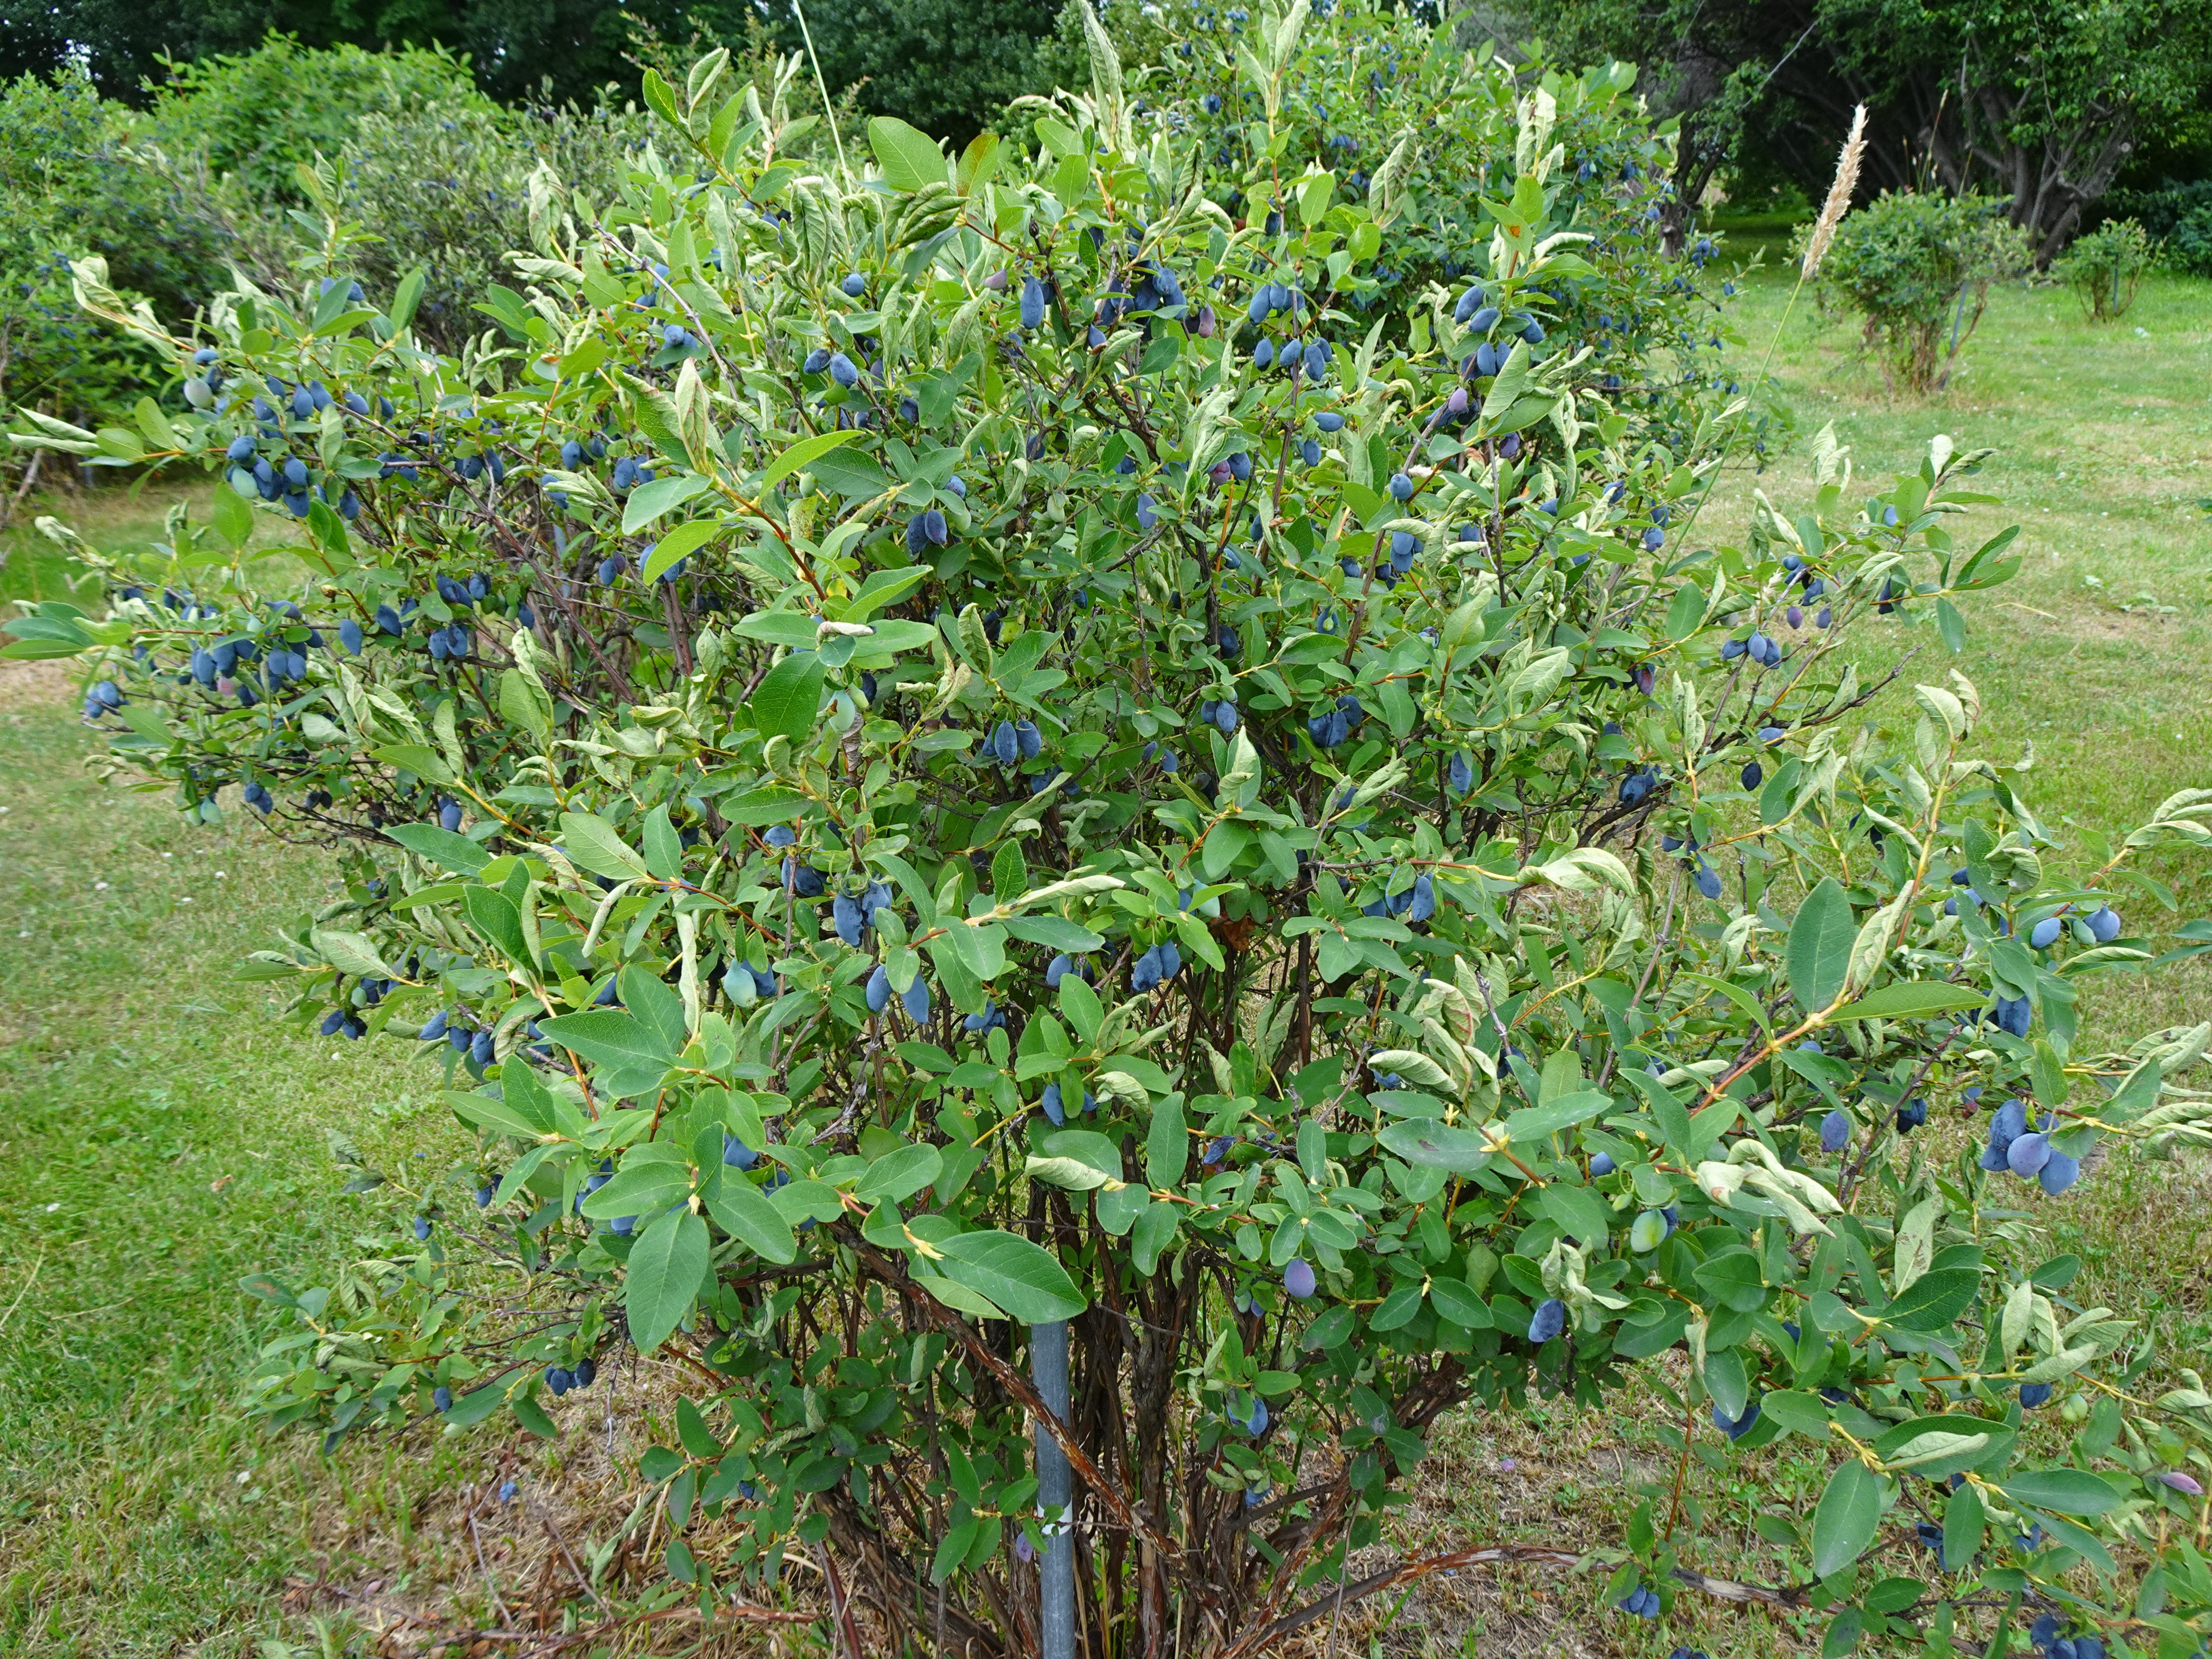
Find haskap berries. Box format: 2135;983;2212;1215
2084;906;2124;939
621;266;634;278
658;560;684;586
282;630;310;653
441;804;463;830
1150;318;1166;339
1249;1297;1265;1319
367;879;380;894
1730;1400;1761;1443
2029;1524;2043;1546
1686;842;1707;871
712;248;723;273
706;591;725;613
1603;479;1627;502
762;823;796;851
1046;496;1068;524
1738;759;1765;793
1322;616;1335;631
1471;307;1501;342
648;292;658;307
940;709;958;728
1364;894;1400;920
320;277;337;296
550;1367;570;1397
237;684;260;706
1787;605;1803;630
1622;661;1656;689
1340;559;1362;577
480;594;499;615
660;343;680;370
703;254;713;268
1376;562;1390;580
339;778;355;798
234;631;260;659
1316;610;1339;635
945;477;968;499
585;433;610;462
1312;336;1336;363
377;395;395;417
863;881;893;920
446;625;471;657
1997;914;2018;942
578;446;596;467
793;615;825;654
904;509;927;556
1472;342;1500;378
319;1007;342;1038
342;1019;359;1044
1226;1405;1242;1422
475;1182;494;1210
682;795;707;827
1390;472;1414;504
418;1009;453;1041
211;640;239;675
1604;678;1619;690
179;590;199;608
455;456;468;475
1312;411;1346;432
214;676;241;707
283;452;311;486
81;699;104;722
1128;942;1166;993
315;484;329;502
2156;1471;2201;1501
1937;1548;1952;1575
860;671;879;707
962;999;998;1032
387;981;402;993
1627;1209;1666;1252
196;798;218;825
662;877;697;892
568;1372;578;1390
1511;311;1544;343
1696;864;1723;901
1820;1385;1850;1411
1027;434;1046;460
227;435;256;464
1981;1136;2011;1173
292;384;312;416
1326;706;1349;751
1247;1393;1268;1439
1031;766;1053;795
2032;1111;2062;1132
273;717;286;731
1045;276;1061;304
1023;260;1033;274
484;453;506;489
1448;388;1473;419
862;964;894;1013
1214;698;1238;735
414;1214;427;1229
472;1030;492;1066
1507;1047;1526;1073
305;627;327;652
1496;342;1512;371
984;1007;1007;1037
1641;1594;1662;1619
678;556;689;575
1644;1064;1661;1077
1617;1596;1633;1612
1271;278;1286;309
1185;299;1202;337
1667;1645;1690;1659
393;454;419;481
503;604;521;620
485;427;504;436
1335;691;1362;727
762;213;780;226
1330;786;1358;817
292;748;309;770
306;789;319;809
741;959;781;995
1177;890;1197;918
1221;548;1242;569
351;1017;369;1036
1649;498;1669;528
1882;505;1904;527
1823;578;1839;604
261;663;282;695
586;975;620;1004
1119;454;1138;480
1303;342;1328;382
1217;628;1242;659
1454;286;1486;323
1640;526;1665;554
609;1214;636;1236
683;332;700;351
1081;1093;1106;1114
1000;332;1025;357
829;351;860;390
254;471;282;504
983;608;1005;644
126;587;141;598
482;1055;501;1071
1426;399;1455;426
1191;880;1224;918
1391;530;1415;554
370;813;384;829
2069;1392;2089;1419
1997;995;2032;1039
596;874;615;892
438;575;463;607
797;1217;817;1230
1536;497;1562;518
1100;939;1118;960
1109;279;1136;315
398;598;420;628
993;719;1019;765
1747;630;1767;661
1168;590;1187;611
981;268;1008;289
778;211;790;221
429;632;453;661
736;1482;759;1503
1666;1032;1676;1045
1794;1040;1821;1056
1085;223;1106;254
1221;580;1227;588
204;604;219;619
1662;833;1687;856
242;780;263;802
996;618;1026;644
1162;441;1189;474
403;785;416;795
1283;1259;1319;1298
339;492;359;521
551;843;563;852
841;272;867;299
449;1019;473;1055
1569;696;1580;716
1245;1481;1273;1505
1073;588;1089;611
460;408;472;419
309;383;332;413
600;555;617;585
1278;337;1300;369
1634;662;1653;698
374;799;386;814
348;984;367;1008
653;261;676;283
1782;555;1802;568
1161;939;1181;980
1408;874;1440;924
1691;1650;1708;1659
1800;578;1824;607
1895;1100;1917;1136
1951;866;1973;887
463;571;487;604
1227;453;1253;483
491;1174;504;1190
1719;637;1748;664
1649;1057;1667;1075
376;450;396;479
1663;1205;1678;1227
1053;766;1081;797
1372;1067;1402;1089
229;467;258;501
1209;454;1229;487
1456;400;1481;426
1161;747;1178;778
98;682;118;704
343;390;370;419
722;1133;732;1151
253;375;282;419
179;673;192;686
375;603;404;639
572;1188;593;1212
1461;352;1479;376
814;399;828;407
1912;1095;1928;1128
724;1134;758;1169
952;503;972;533
1760;636;1783;669
1600;721;1622;740
1628;1584;1648;1614
1248;510;1268;543
334;970;347;987
499;1483;510;1501
336;617;363;657
1588;1152;1615;1179
415;1223;432;1242
1386;575;1399;589
1619;773;1649;804
1053;431;1069;453
416;428;439;445
253;455;275;486
1962;1079;1985;1104
1525;1299;1564;1346
1263;196;1282;237
1303;434;1321;469
540;474;569;508
283;489;310;519
2037;1150;2080;1197
848;683;871;710
135;647;156;673
1388;547;1414;573
760;1170;790;1193
638;539;661;574
1127;243;1151;270
587;1157;615;1194
1647;765;1664;787
2020;1381;2053;1410
2060;1405;2080;1423
2029;1611;2058;1645
697;593;708;611
784;855;823;896
163;594;176;609
1249;283;1279;321
826;819;846;838
1496;1049;1510;1080
852;332;875;353
1869;826;1886;851
183;380;210;410
870;359;894;388
1306;708;1330;750
429;1387;453;1415
1127;217;1150;241
1499;427;1522;460
1285;279;1307;310
256;789;277;814
1040;1085;1065;1126
1418;626;1439;650
631;454;658;487
1136;491;1158;529
1143;741;1157;761
1046;952;1075;990
517;604;537;634
1020;274;1045;332
614;454;635;490
270;601;300;626
378;979;390;995
1133;272;1166;316
245;615;267;645
1413;537;1424;553
1135;318;1157;342
825;684;856;734
1088;323;1111;350
1849;813;1862;829
285;653;309;680
209;367;227;391
1949;1469;1970;1488
1783;562;1809;584
1151;266;1179;295
1236;1290;1252;1313
1960;1023;1985;1043
1992;1099;2026;1145
2029;916;2064;948
836;406;849;433
1161;284;1187;319
1809;605;1833;630
681;1318;695;1334
834;886;865;951
743;201;754;211
901;961;930;1028
982;719;1004;757
572;1358;600;1388
1460;523;1481;543
1014;1530;1034;1563
319;790;335;809
2015;1535;2033;1551
1110;464;1124;483
183;603;201;621
1018;717;1044;760
361;978;378;989
854;411;875;430
1819;1109;1852;1158
1073;959;1095;987
1200;694;1218;727
365;987;382;1004
1876;586;1904;616
245;671;271;701
463;454;485;480
1449;747;1472;798
681;826;699;846
506;1481;519;1496
800;471;822;491
545;1367;556;1384
1757;721;1788;746
560;435;580;469
527;1021;552;1062
2008;1130;2052;1175
1571;550;1589;567
922;508;947;545
1945;888;1981;913
1972;989;1995;1025
2072;917;2097;949
2047;1636;2078;1659
267;646;288;677
1196;304;1216;338
1915;1522;1943;1547
613;551;626;574
899;396;921;423
407;957;421;977
1782;1320;1804;1343
1711;1401;1734;1433
192;650;220;688
1098;299;1118;324
2076;1634;2109;1657
718;959;759;1011
805;349;833;380
438;796;460;810
693;546;703;554
186;803;203;827
663;326;690;353
634;293;652;312
194;348;219;368
1251;333;1274;372
346;281;365;305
